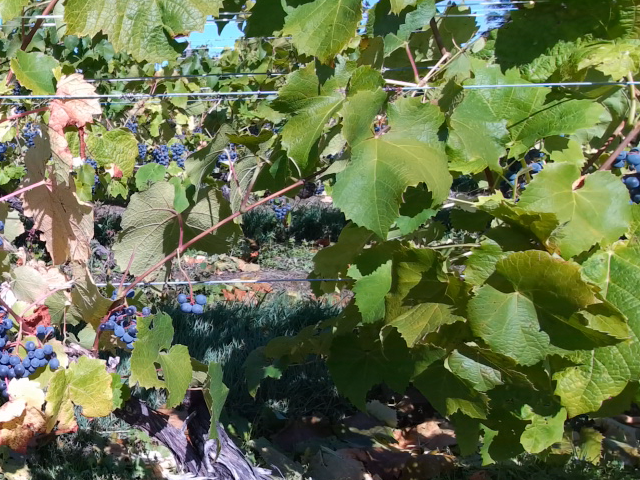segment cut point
Instances as JSON below:
<instances>
[{
	"label": "cut point",
	"mask_w": 640,
	"mask_h": 480,
	"mask_svg": "<svg viewBox=\"0 0 640 480\" xmlns=\"http://www.w3.org/2000/svg\"><path fill=\"white\" fill-rule=\"evenodd\" d=\"M176 260H177V264H178V268L181 271V273L184 275V277L186 278V280H189V276L187 274V272H185V270L183 269L182 265H181V261L179 258V253L176 254Z\"/></svg>",
	"instance_id": "1"
}]
</instances>
